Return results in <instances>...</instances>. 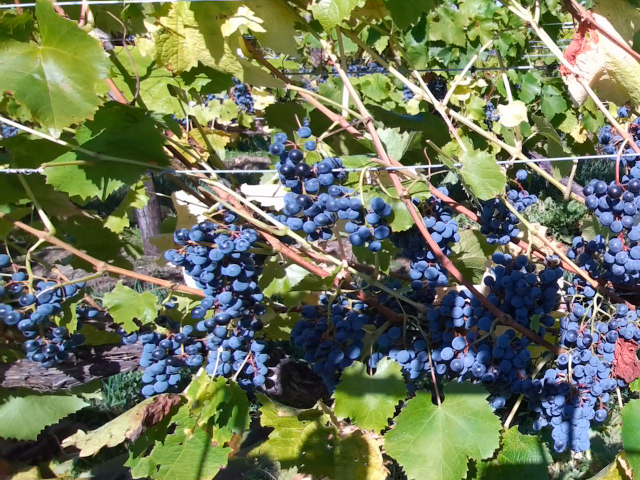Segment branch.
Segmentation results:
<instances>
[{
    "mask_svg": "<svg viewBox=\"0 0 640 480\" xmlns=\"http://www.w3.org/2000/svg\"><path fill=\"white\" fill-rule=\"evenodd\" d=\"M0 122L10 125L18 130H22V131H26L29 134H32L34 136L37 137H41L43 139L46 140H50L52 142H56V143H60L63 146L66 147H70V148H74L77 149L83 153L88 154L89 156H92L93 158L96 159H100L103 161H108V162H112V163H117V164H125V165H132V166H137V167H141V168H147V169H151V170H156V171H164V172H173L174 168L173 167H166V166H158V165H153V164H149V163H143V162H139V161H134V160H127V159H119V158H114V157H110V156H105L102 154H98L86 147L81 146L80 144H76V143H72V142H68L62 138L59 137H54L52 135H48L45 134L43 132H39L37 130L31 129L29 126H24L21 125L15 121L9 120L7 118L4 117H0Z\"/></svg>",
    "mask_w": 640,
    "mask_h": 480,
    "instance_id": "branch-9",
    "label": "branch"
},
{
    "mask_svg": "<svg viewBox=\"0 0 640 480\" xmlns=\"http://www.w3.org/2000/svg\"><path fill=\"white\" fill-rule=\"evenodd\" d=\"M534 31L536 35L546 44V46L557 56V58L567 67L570 72V75L573 77L578 86L591 98L594 99L596 104L599 106L601 111L603 112L606 120L612 125L614 129H616L623 137V139H628L627 144L629 147L635 152H640V148L637 146L636 142L630 136V134L625 130V128L619 124L608 109V106L604 103L602 98L584 82L581 76L578 74L575 66L571 63V61L561 52L556 44L552 42L550 35L547 30L540 24L537 23L535 25Z\"/></svg>",
    "mask_w": 640,
    "mask_h": 480,
    "instance_id": "branch-6",
    "label": "branch"
},
{
    "mask_svg": "<svg viewBox=\"0 0 640 480\" xmlns=\"http://www.w3.org/2000/svg\"><path fill=\"white\" fill-rule=\"evenodd\" d=\"M340 32L342 33L343 37L346 40H353V41H358L359 44L368 52V54L370 56H372L375 60H377L378 62H380L384 67H386V69L392 74L394 75L401 83H403L407 88H411L415 93H418L419 96H421L425 101L429 102V103H434L432 105L433 109H438L439 112H441V118L443 119L445 125L449 128V130L453 133L455 141L457 143V145L464 151L467 152L468 148L465 144H463L458 131L456 130V128L453 126V124L449 121L448 117L446 116V112L448 114H450L452 117H455L456 119H458L460 122H462L465 126L470 127L472 129H474L476 132H479L487 137H489L490 139L494 140L496 143L500 144L503 148H506L507 150H509L510 152L514 153L519 159L521 160H525L526 156L524 154H522L519 150H517L516 148H514L513 146L509 145L508 143H506L505 141H503L502 139H500L498 136H496L495 134H492L491 132L477 126L475 123H472L468 120H466L462 115H460L459 113L455 112L454 110H452L451 108H449L448 106H444L442 102H440L436 97H434L433 93L430 91V89L428 88V85L426 83L425 80V76L423 75V73L416 67V65L412 62V60L409 58V56L406 54V51L403 47V45L401 44L399 38L397 37V35L395 34L394 31L390 32V36L392 37V39L394 40L396 47L399 49L401 56L404 58V60L406 61V63L409 65V67L418 75V77L420 78V82H421V86L423 87L424 92L416 87L413 83H410L408 80H406L403 76H401V74L399 72H397L385 59H383L382 57H380L379 55H377L364 41V39L360 36H355V35H349L347 33V31L344 28L340 29Z\"/></svg>",
    "mask_w": 640,
    "mask_h": 480,
    "instance_id": "branch-4",
    "label": "branch"
},
{
    "mask_svg": "<svg viewBox=\"0 0 640 480\" xmlns=\"http://www.w3.org/2000/svg\"><path fill=\"white\" fill-rule=\"evenodd\" d=\"M389 176L394 183L397 193L400 199L405 204V210L409 213L411 217L414 218V221L418 225L421 234L423 237L428 240L429 247L431 250L441 259L444 266L461 282L463 285L474 295L476 299H478L486 308H489L494 314L501 316V319L508 322L512 326H515L518 329H521L523 332L529 334L533 339H535L538 343H540L544 348L548 349L552 353L560 354L562 352L566 353L567 356H570L569 350L561 349L558 346L547 341L543 338L538 332H536L533 328L524 324L523 322L515 319L514 317L506 314L500 308L495 306L491 301H489L479 290L469 281L467 277H465L448 259L446 254L441 251V247L432 239L427 226L425 225L424 219L420 216V211L418 208L411 202L410 198L405 193L403 188V182L397 176L395 171H390Z\"/></svg>",
    "mask_w": 640,
    "mask_h": 480,
    "instance_id": "branch-5",
    "label": "branch"
},
{
    "mask_svg": "<svg viewBox=\"0 0 640 480\" xmlns=\"http://www.w3.org/2000/svg\"><path fill=\"white\" fill-rule=\"evenodd\" d=\"M260 235L263 238H265L266 240H268L272 245H274L281 253L286 254V255L290 256L291 258H293L306 271H309L310 273H313L315 275H319V276H321L323 278H326V279L334 282L335 284L341 286L342 288H344L345 290L349 291L351 294L356 296L358 299L362 300L367 305H369L370 307L374 308L376 311H378V312L386 315L387 317H389L395 323H398L400 321V317L398 315H396L392 310H389L388 308H386V307L382 306L381 304L377 303L376 301L371 299L369 296L365 295L363 292L359 291L353 285H351L350 283L346 282L345 280L339 278L338 276H336V275H334V274H332V273H330L328 271H325L324 269L315 267V266L307 263L298 253H296L294 250L288 248L286 245L281 244L273 235H271L265 229H262L260 231Z\"/></svg>",
    "mask_w": 640,
    "mask_h": 480,
    "instance_id": "branch-7",
    "label": "branch"
},
{
    "mask_svg": "<svg viewBox=\"0 0 640 480\" xmlns=\"http://www.w3.org/2000/svg\"><path fill=\"white\" fill-rule=\"evenodd\" d=\"M309 33L314 37V39L319 43V45L321 46L323 52L327 55L329 61L331 62V64L333 65V67L335 68L337 74L339 75V77L341 78L344 87L347 89V92L349 94V96L352 98V100L356 103V105L358 106L363 119L365 121V125L368 129V132L371 136V139L373 141V143L368 140L366 137H364L363 135H361V133L358 131V129L351 124L348 120L341 118L340 116H337L334 112L324 108L315 98L310 97L308 94H306L298 84H296L295 82L288 80L286 77H284L283 75H281L279 73V71L275 68V66L271 63V61L265 57L263 54H261L256 48H254L248 41H244L242 43V46L250 53L252 54L257 60H259L260 62H262L267 69L270 71V73L272 74V76L280 83L284 84L286 87H289L290 89L294 90L297 94H299L300 96H302L305 99H308L314 106H316L319 110H321L322 112H324L326 115H328L330 117V119L332 121H334L335 123H337L338 125H342L344 126L346 129H348L353 135L354 137L363 145H365L371 152H375L377 151L380 159L382 161V163L385 166H400L401 165V161L399 159L393 158L390 155H387L384 148L382 147V144L380 142V138L376 132V129L373 125L371 116L369 114V111L366 107V105L363 103V101L360 99V97L357 95V93L355 92V89L353 87V85L351 84L347 74L345 73V71L343 70L341 64L338 62V60L336 59V56L334 54V52L329 48L327 42L325 41V39L320 35V33L315 29V28H311L309 30Z\"/></svg>",
    "mask_w": 640,
    "mask_h": 480,
    "instance_id": "branch-1",
    "label": "branch"
},
{
    "mask_svg": "<svg viewBox=\"0 0 640 480\" xmlns=\"http://www.w3.org/2000/svg\"><path fill=\"white\" fill-rule=\"evenodd\" d=\"M529 167L532 168L534 171H536L537 173L541 174L542 176H544L547 180H549L552 184H554L561 192L565 193L566 195H568L571 198H574L575 200H577L578 202L582 203L583 206L587 205V200L584 199L583 197L577 195L576 193H573L572 191H570L569 189L565 188L560 182H558L555 178H553L549 173H547L545 170H543L542 168L538 167L536 164L534 163H530Z\"/></svg>",
    "mask_w": 640,
    "mask_h": 480,
    "instance_id": "branch-11",
    "label": "branch"
},
{
    "mask_svg": "<svg viewBox=\"0 0 640 480\" xmlns=\"http://www.w3.org/2000/svg\"><path fill=\"white\" fill-rule=\"evenodd\" d=\"M399 173L401 175L407 176L408 178L412 179L413 181H415L419 185L423 186L425 189L429 190L432 194H434L441 201H443L446 204H449L450 206H453V207L459 209L460 211H462L465 215H467L471 219H473L475 221H478L480 219V216L477 213H475L474 211H472L471 209H469L466 205H464L463 203H461V202H459V201H457V200L445 195L442 191L437 189L432 183L426 181L425 179H423L422 177H420L419 175H417L413 171H411L409 169H406L404 171H399Z\"/></svg>",
    "mask_w": 640,
    "mask_h": 480,
    "instance_id": "branch-10",
    "label": "branch"
},
{
    "mask_svg": "<svg viewBox=\"0 0 640 480\" xmlns=\"http://www.w3.org/2000/svg\"><path fill=\"white\" fill-rule=\"evenodd\" d=\"M497 200L499 202H502L509 209L510 213L523 228L527 229L535 238L540 240L562 260L561 265L564 269L569 270L573 274H579L591 287H593L601 295L605 296L608 300H612L614 298V295L610 291L596 282L589 274H587V272L583 268L574 263L556 244H554L550 239L546 238L534 226L526 221L525 218L516 209L515 205L505 195H499L497 197Z\"/></svg>",
    "mask_w": 640,
    "mask_h": 480,
    "instance_id": "branch-8",
    "label": "branch"
},
{
    "mask_svg": "<svg viewBox=\"0 0 640 480\" xmlns=\"http://www.w3.org/2000/svg\"><path fill=\"white\" fill-rule=\"evenodd\" d=\"M165 148L172 153L178 160L184 163L189 169H198L196 165L184 154H182L177 148H175L171 143H167Z\"/></svg>",
    "mask_w": 640,
    "mask_h": 480,
    "instance_id": "branch-12",
    "label": "branch"
},
{
    "mask_svg": "<svg viewBox=\"0 0 640 480\" xmlns=\"http://www.w3.org/2000/svg\"><path fill=\"white\" fill-rule=\"evenodd\" d=\"M0 220L8 225H12L13 227L18 228L27 236L34 238L35 240L41 239L43 241V244L48 247L63 250L66 254L76 257L82 260L84 263L93 266L94 268L103 269L105 272L116 274L126 281H133L144 285L158 287L180 294H192L197 298H203L205 296V291L196 285H185L137 272H130L120 265L105 262L104 260L98 259L94 255L88 254L86 251L80 248L70 245L67 241L55 239L51 236H48L47 234H44L40 230L31 227L24 220L16 218L8 212L0 211Z\"/></svg>",
    "mask_w": 640,
    "mask_h": 480,
    "instance_id": "branch-3",
    "label": "branch"
},
{
    "mask_svg": "<svg viewBox=\"0 0 640 480\" xmlns=\"http://www.w3.org/2000/svg\"><path fill=\"white\" fill-rule=\"evenodd\" d=\"M195 175L201 181L211 185L210 189L216 195H218L219 197L223 198L225 201L232 204L243 215L247 217H251L253 215V212L247 209L237 199H239L240 201H243L246 205L253 208L256 212L261 214L266 220L270 221L273 224H276L277 226L282 227L289 235L295 238L302 245L306 246L307 248L311 249L313 252L317 254L323 255L328 262H331L341 270L348 272L350 274H353L356 277H359L360 279H362L364 282H366L371 286H376L380 290H383L387 294L392 295L396 299L402 300L404 303H407L413 306L415 309H417L422 313H427L429 311V308L427 306L419 303L412 297L407 296L404 293H401L398 290H395L394 288L389 287L388 285L379 281L378 279H373L372 277L368 276L367 274H365L364 272H362L361 270L355 267L345 264L341 260L337 259L335 256L331 255L327 249L323 247H319L312 241H309L308 239L304 238L299 232H297L294 228H292L286 221L279 219L278 217L270 214L257 202L253 201L251 198H249L247 195L243 194L242 192H239L235 188H232L231 186L223 183L222 181H219L215 178L207 176L206 174H195Z\"/></svg>",
    "mask_w": 640,
    "mask_h": 480,
    "instance_id": "branch-2",
    "label": "branch"
}]
</instances>
